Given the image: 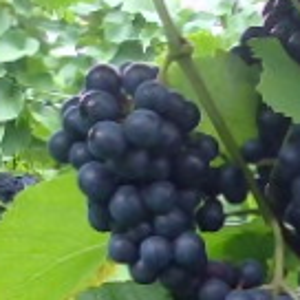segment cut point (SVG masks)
<instances>
[{
	"label": "cut point",
	"mask_w": 300,
	"mask_h": 300,
	"mask_svg": "<svg viewBox=\"0 0 300 300\" xmlns=\"http://www.w3.org/2000/svg\"><path fill=\"white\" fill-rule=\"evenodd\" d=\"M180 53H189L193 55L194 53V46L191 41H187V43L181 46H169L168 48V56L164 61L163 65L159 69V75L165 73L168 70L171 62H176V56Z\"/></svg>",
	"instance_id": "7d7e1d6f"
},
{
	"label": "cut point",
	"mask_w": 300,
	"mask_h": 300,
	"mask_svg": "<svg viewBox=\"0 0 300 300\" xmlns=\"http://www.w3.org/2000/svg\"><path fill=\"white\" fill-rule=\"evenodd\" d=\"M271 226L275 233L276 238V270H275V276L272 281H270V284H273L277 287L281 286L282 278H283V244H282V238H281V232L278 224L275 220H272Z\"/></svg>",
	"instance_id": "6a23745f"
}]
</instances>
